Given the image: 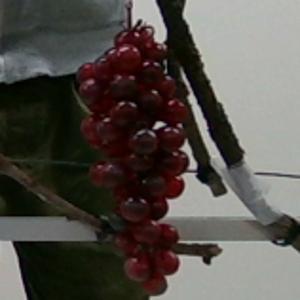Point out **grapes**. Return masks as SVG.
Segmentation results:
<instances>
[{
  "label": "grapes",
  "instance_id": "grapes-1",
  "mask_svg": "<svg viewBox=\"0 0 300 300\" xmlns=\"http://www.w3.org/2000/svg\"><path fill=\"white\" fill-rule=\"evenodd\" d=\"M114 46L76 72L80 100L90 113L80 130L98 163L87 181L115 206L108 222L116 231L113 248L126 255L120 263L123 279L159 297L168 290V277L181 267L174 252L179 230L157 222L168 214V201L185 189L182 176L190 157L182 150L186 133L179 124L186 110L172 99L176 84L165 74L168 52L151 33L121 30Z\"/></svg>",
  "mask_w": 300,
  "mask_h": 300
}]
</instances>
